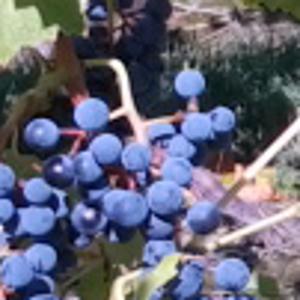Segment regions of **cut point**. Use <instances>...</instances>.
<instances>
[{
	"label": "cut point",
	"mask_w": 300,
	"mask_h": 300,
	"mask_svg": "<svg viewBox=\"0 0 300 300\" xmlns=\"http://www.w3.org/2000/svg\"><path fill=\"white\" fill-rule=\"evenodd\" d=\"M86 69L95 68H114L116 71V78L118 82L120 98L118 99V106L113 110V116L120 118L125 114L127 120L135 130V136L138 140H144L146 133L144 131L145 124L142 117L135 109L134 96L132 94L129 77L127 73V66L125 62L118 57L110 56H96L91 58H83Z\"/></svg>",
	"instance_id": "6a23745f"
}]
</instances>
